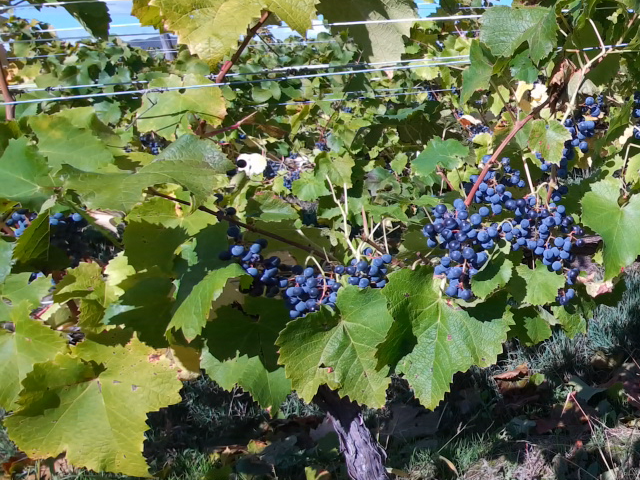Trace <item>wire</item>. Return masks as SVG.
Returning a JSON list of instances; mask_svg holds the SVG:
<instances>
[{
	"label": "wire",
	"instance_id": "wire-4",
	"mask_svg": "<svg viewBox=\"0 0 640 480\" xmlns=\"http://www.w3.org/2000/svg\"><path fill=\"white\" fill-rule=\"evenodd\" d=\"M628 43L627 42H621V43H610V44H605L603 45H596V46H585L581 48L582 52H588V51H598V50H603L605 49H613L615 48H624L627 47Z\"/></svg>",
	"mask_w": 640,
	"mask_h": 480
},
{
	"label": "wire",
	"instance_id": "wire-2",
	"mask_svg": "<svg viewBox=\"0 0 640 480\" xmlns=\"http://www.w3.org/2000/svg\"><path fill=\"white\" fill-rule=\"evenodd\" d=\"M483 13L472 14H450V15H438L427 18H388V19H362L355 21H332V22H315L314 28L318 27H334V26H357L364 24H391V23H429L440 20H452V19H474L483 18Z\"/></svg>",
	"mask_w": 640,
	"mask_h": 480
},
{
	"label": "wire",
	"instance_id": "wire-1",
	"mask_svg": "<svg viewBox=\"0 0 640 480\" xmlns=\"http://www.w3.org/2000/svg\"><path fill=\"white\" fill-rule=\"evenodd\" d=\"M470 57H471L470 53H464L460 55H446V56H438L433 58L406 59V60H354V61H344L340 63H327V64H320V65H279V66L263 67V68L246 70V71L228 72L225 74V78L229 79L230 77L248 76V75H255L260 73L282 71V70H322V69L342 68L346 66H356V65H396V66L367 68L362 70H353V71H345V72L314 73V74L299 75V76H266V77L250 78V79L241 80V81H229V82H223V83L184 84V85H175V86L163 87V88H150V89H141V90H134V91H116V92H108V93H83V94H73V95H60L56 97H40V98L28 99V100L0 101V106L30 105V104H37L42 102H59L62 100H75V99H86V98H110V97H118V96H136V95H143V94L165 93V92H173L177 90L198 89V88H225V87H231V86H243V85H248L252 83H260V82H268V81H301V80H310V79H316V78L348 77V76H355V75H364L369 73L392 72V71L415 69V68H441L444 66L467 65L468 61L462 60V59H466Z\"/></svg>",
	"mask_w": 640,
	"mask_h": 480
},
{
	"label": "wire",
	"instance_id": "wire-3",
	"mask_svg": "<svg viewBox=\"0 0 640 480\" xmlns=\"http://www.w3.org/2000/svg\"><path fill=\"white\" fill-rule=\"evenodd\" d=\"M148 79H138V80H129V81H95V82H84L77 84H65V85H57V86H49V87H34L28 89H14V94H30L36 92H52L59 90H67V89H79L86 87H97V86H131V85H140L147 84Z\"/></svg>",
	"mask_w": 640,
	"mask_h": 480
}]
</instances>
